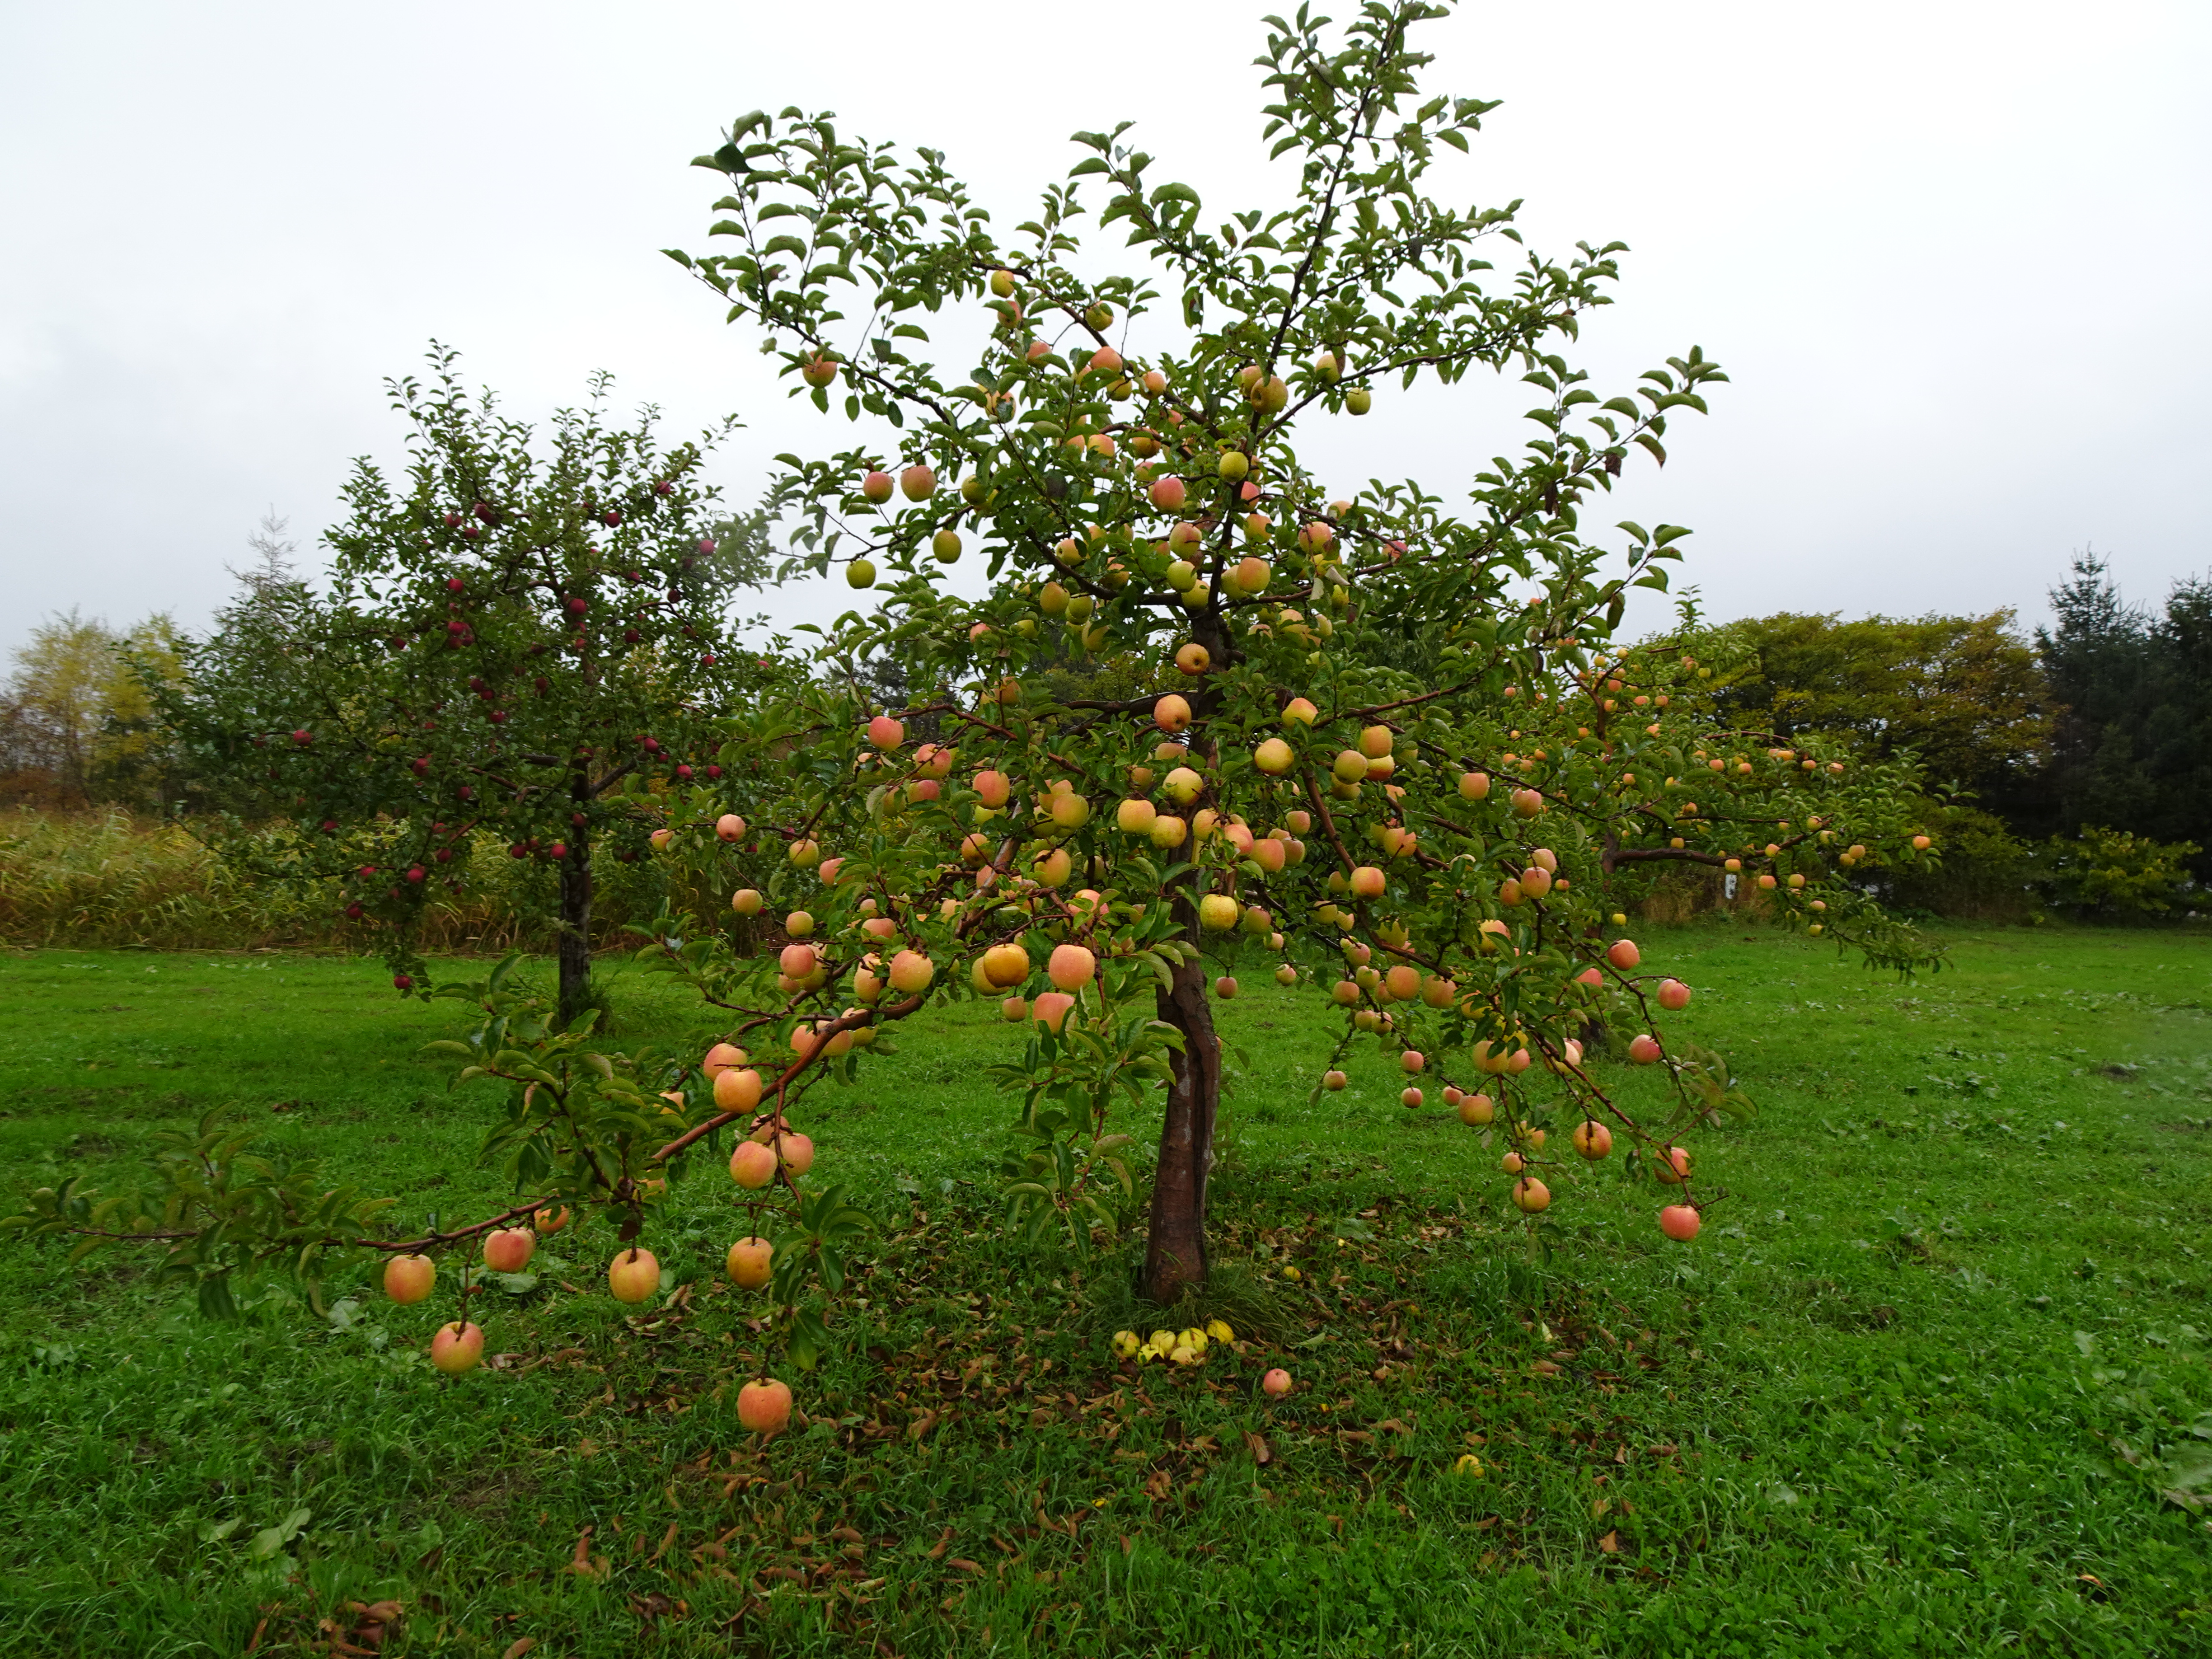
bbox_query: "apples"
[1285,811,1310,836]
[1249,839,1285,873]
[974,489,999,517]
[1049,945,1095,994]
[1309,554,1342,575]
[1375,982,1397,1005]
[803,956,828,992]
[1065,606,1088,625]
[1221,565,1250,600]
[534,1204,569,1234]
[1500,878,1528,906]
[1544,1042,1580,1076]
[819,1025,849,1057]
[916,743,952,779]
[802,350,837,387]
[790,1024,824,1061]
[1315,614,1332,636]
[962,475,988,505]
[961,833,991,867]
[1458,1094,1493,1127]
[704,1043,748,1083]
[1346,387,1370,415]
[1091,346,1122,375]
[1334,750,1368,785]
[976,865,992,889]
[1429,882,1444,905]
[1040,582,1070,615]
[737,1378,792,1433]
[1127,759,1152,786]
[1176,643,1209,676]
[916,914,927,921]
[1371,1012,1393,1036]
[1152,478,1185,514]
[1526,848,1557,875]
[1346,943,1371,967]
[1132,427,1161,458]
[975,804,1007,826]
[991,270,1015,298]
[1017,619,1039,639]
[1243,906,1271,934]
[1031,835,1057,854]
[1033,992,1076,1037]
[1358,725,1392,759]
[1563,1037,1583,1060]
[653,1091,686,1116]
[1514,1120,1530,1139]
[1653,1147,1691,1184]
[1334,911,1354,931]
[1028,805,1061,838]
[1298,521,1331,555]
[769,1132,813,1178]
[1052,794,1089,829]
[1192,809,1222,842]
[1215,1035,1222,1049]
[749,1114,790,1144]
[1386,966,1421,1001]
[1226,814,1247,826]
[1154,694,1191,733]
[1364,754,1395,782]
[882,786,906,817]
[969,623,992,644]
[1502,1152,1527,1176]
[1461,990,1493,1019]
[1056,538,1082,566]
[1312,900,1337,925]
[484,1230,533,1273]
[985,390,1016,423]
[1139,372,1166,400]
[1085,301,1113,331]
[1083,855,1106,880]
[1513,1177,1550,1214]
[1241,365,1263,397]
[1178,424,1195,441]
[777,974,801,995]
[1393,749,1418,764]
[972,771,1010,810]
[1014,931,1026,952]
[1629,1034,1661,1066]
[1099,557,1129,590]
[1257,602,1285,624]
[1148,542,1170,556]
[805,943,828,957]
[940,899,965,924]
[863,471,893,504]
[1315,355,1340,385]
[853,752,882,775]
[1450,854,1476,871]
[1106,376,1132,401]
[1250,375,1288,415]
[840,1007,877,1046]
[1130,904,1146,926]
[1237,900,1246,920]
[786,911,813,939]
[384,1254,436,1305]
[508,1226,536,1259]
[1275,964,1296,986]
[640,1169,666,1196]
[1063,889,1109,929]
[1003,996,1027,1023]
[1053,827,1076,838]
[1277,780,1299,797]
[905,753,924,779]
[983,943,1029,987]
[1167,561,1197,593]
[1155,743,1187,760]
[890,950,933,994]
[1386,941,1415,964]
[816,1018,832,1029]
[1328,871,1350,894]
[819,858,851,886]
[1218,445,1234,455]
[1573,1121,1611,1161]
[846,559,876,589]
[609,1248,659,1304]
[1281,697,1318,730]
[1511,788,1542,819]
[1350,867,1385,902]
[980,688,1000,705]
[1502,1030,1529,1050]
[1331,584,1349,605]
[1035,848,1071,888]
[1332,981,1359,1007]
[1112,523,1133,542]
[1181,579,1210,610]
[946,958,960,978]
[1027,341,1051,364]
[1528,1127,1545,1148]
[431,1321,484,1374]
[1263,932,1284,951]
[1280,837,1305,867]
[1056,434,1085,453]
[1134,461,1157,483]
[1068,593,1093,619]
[1082,621,1110,653]
[1182,500,1202,520]
[1656,979,1690,1011]
[789,839,819,868]
[732,889,762,917]
[1505,1047,1530,1076]
[1384,784,1406,802]
[713,1069,762,1115]
[1514,948,1533,969]
[1340,936,1358,949]
[1167,442,1192,463]
[780,945,816,979]
[1013,581,1031,598]
[1219,451,1249,482]
[1661,1205,1700,1241]
[976,384,988,408]
[651,829,675,853]
[1087,434,1115,459]
[1401,1087,1423,1108]
[1110,937,1135,953]
[1071,364,1093,385]
[1422,975,1458,1009]
[1355,1010,1376,1031]
[1215,977,1238,999]
[1268,828,1291,841]
[888,893,910,911]
[1356,966,1380,989]
[999,878,1036,910]
[1383,827,1416,857]
[907,779,939,804]
[933,530,962,563]
[1382,540,1408,559]
[1330,772,1361,801]
[1248,624,1273,640]
[1521,866,1551,899]
[727,1237,773,1291]
[901,465,936,502]
[730,1141,778,1190]
[1254,479,1261,495]
[1200,894,1238,932]
[860,899,879,918]
[1451,970,1471,976]
[1495,1016,1521,1031]
[858,951,880,969]
[868,716,903,752]
[1459,773,1489,801]
[1327,500,1351,518]
[1247,455,1261,482]
[1300,625,1321,651]
[1066,620,1088,634]
[1323,1070,1346,1091]
[1276,609,1304,634]
[1120,835,1129,849]
[1117,799,1156,834]
[1150,815,1186,850]
[1169,522,1202,559]
[1472,1040,1510,1074]
[1607,939,1640,971]
[1575,968,1603,987]
[972,956,1010,996]
[860,918,897,944]
[1162,767,1203,807]
[1474,919,1510,953]
[852,916,862,928]
[1160,409,1182,426]
[994,676,1021,704]
[1240,481,1259,512]
[1369,818,1395,846]
[716,814,745,843]
[1237,557,1270,593]
[971,757,990,779]
[997,300,1019,329]
[1375,915,1408,947]
[1084,525,1106,542]
[1401,1051,1424,1074]
[1217,824,1253,856]
[853,959,891,1003]
[1254,738,1294,776]
[1442,1085,1463,1106]
[1075,415,1087,427]
[1038,779,1073,814]
[1243,514,1272,544]
[947,864,961,871]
